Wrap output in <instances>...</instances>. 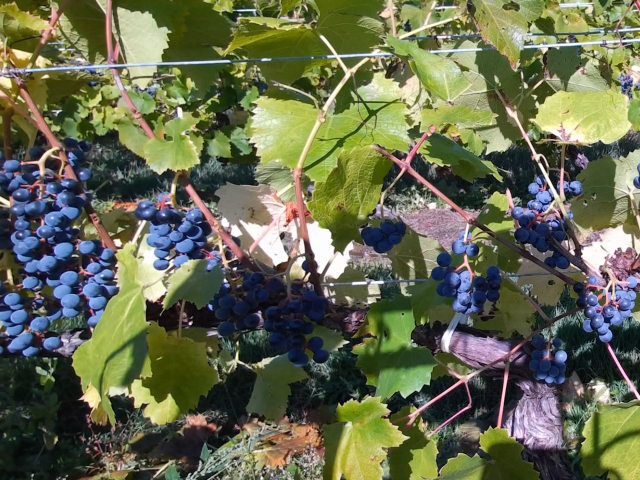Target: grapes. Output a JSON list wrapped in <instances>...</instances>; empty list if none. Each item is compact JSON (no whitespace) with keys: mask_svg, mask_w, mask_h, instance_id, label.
<instances>
[{"mask_svg":"<svg viewBox=\"0 0 640 480\" xmlns=\"http://www.w3.org/2000/svg\"><path fill=\"white\" fill-rule=\"evenodd\" d=\"M2 302L10 307V309H0V321L7 331L9 344L6 350L9 354H15L21 351L24 357H33L38 354L39 347L32 346V333H22L24 323L28 321V311L23 309L21 302V294L18 292L5 293L2 296Z\"/></svg>","mask_w":640,"mask_h":480,"instance_id":"grapes-9","label":"grapes"},{"mask_svg":"<svg viewBox=\"0 0 640 480\" xmlns=\"http://www.w3.org/2000/svg\"><path fill=\"white\" fill-rule=\"evenodd\" d=\"M22 287L27 291L37 292L43 288V280L36 276H27L21 280Z\"/></svg>","mask_w":640,"mask_h":480,"instance_id":"grapes-14","label":"grapes"},{"mask_svg":"<svg viewBox=\"0 0 640 480\" xmlns=\"http://www.w3.org/2000/svg\"><path fill=\"white\" fill-rule=\"evenodd\" d=\"M361 235L367 246H373V250L381 254L401 243L402 238L406 235V225L404 223L392 224L391 221H386L378 227H364Z\"/></svg>","mask_w":640,"mask_h":480,"instance_id":"grapes-11","label":"grapes"},{"mask_svg":"<svg viewBox=\"0 0 640 480\" xmlns=\"http://www.w3.org/2000/svg\"><path fill=\"white\" fill-rule=\"evenodd\" d=\"M533 346L537 349L531 353L529 367L532 369V375L535 381H545L548 386L554 384H562L566 381L565 373L568 355L562 347L560 338L553 339V345L559 349L555 352L554 360H545L548 357L545 347V340L542 335H536L532 339Z\"/></svg>","mask_w":640,"mask_h":480,"instance_id":"grapes-10","label":"grapes"},{"mask_svg":"<svg viewBox=\"0 0 640 480\" xmlns=\"http://www.w3.org/2000/svg\"><path fill=\"white\" fill-rule=\"evenodd\" d=\"M78 252L82 256L91 255L97 261L85 264V272L91 276L79 281V289L88 300L87 309L92 312L86 326L95 328L102 321L107 306L106 297H115L118 294L119 284L115 282V271L103 269L115 263L116 252L103 247L100 240H83L78 245Z\"/></svg>","mask_w":640,"mask_h":480,"instance_id":"grapes-6","label":"grapes"},{"mask_svg":"<svg viewBox=\"0 0 640 480\" xmlns=\"http://www.w3.org/2000/svg\"><path fill=\"white\" fill-rule=\"evenodd\" d=\"M464 232V230H461L457 240L451 244L452 254L454 256L466 254L469 258H476L479 255V248L475 243L469 245L463 243Z\"/></svg>","mask_w":640,"mask_h":480,"instance_id":"grapes-12","label":"grapes"},{"mask_svg":"<svg viewBox=\"0 0 640 480\" xmlns=\"http://www.w3.org/2000/svg\"><path fill=\"white\" fill-rule=\"evenodd\" d=\"M243 283H235V292H244L243 301H238L231 293V284L228 280L221 282L220 289L215 293V298L208 303V310L213 312V317L221 321L217 325V332L221 336H228L235 327L238 330L256 329L259 325L260 315H263V331L271 333L269 345L272 351L288 349L287 357L296 369H303L308 363V354L305 350V335L313 332V325L305 323L303 319L280 318L281 315L303 316L310 321H321L324 309L327 307V299L319 297L314 291H310L302 283H293L290 291L293 295L285 305L276 306L269 299L271 293L283 288V281L279 278H268L258 273H243Z\"/></svg>","mask_w":640,"mask_h":480,"instance_id":"grapes-2","label":"grapes"},{"mask_svg":"<svg viewBox=\"0 0 640 480\" xmlns=\"http://www.w3.org/2000/svg\"><path fill=\"white\" fill-rule=\"evenodd\" d=\"M63 146L68 149L64 156L76 179L49 180L44 185L47 192L43 193L41 201H32L31 191L20 188L21 184L34 186L41 179L38 170L15 175L21 170V162L7 160L0 173V183H7L6 190L11 192L13 198L9 215L16 217L13 221L16 230L10 234V244L25 273H51L58 265L70 262L76 253L72 241L78 237V230L71 227V221L78 220L81 209L91 202L90 193L77 194L78 181L89 182L93 176L89 167L81 166L84 156L91 150V143L67 136ZM51 194L56 199L51 201L48 208L47 199L52 198ZM41 238L48 240L54 255L46 254L39 259L33 255L42 248Z\"/></svg>","mask_w":640,"mask_h":480,"instance_id":"grapes-1","label":"grapes"},{"mask_svg":"<svg viewBox=\"0 0 640 480\" xmlns=\"http://www.w3.org/2000/svg\"><path fill=\"white\" fill-rule=\"evenodd\" d=\"M544 184V176L538 175L535 183L528 185V193L535 195V197L528 201L527 208L514 207L512 209L511 216L514 220H518V224L521 227L514 232V237L519 242L529 243L538 252L553 251L554 254L552 257H547L545 263L554 268L565 269L570 266V261L562 256L559 250L554 249L551 243L546 241V236L548 234L553 235L562 241L564 232L561 229L566 228V218L545 219L544 222H538L534 228L530 226L534 223L537 215L548 211L551 201L554 199V194L550 189L540 190V185Z\"/></svg>","mask_w":640,"mask_h":480,"instance_id":"grapes-5","label":"grapes"},{"mask_svg":"<svg viewBox=\"0 0 640 480\" xmlns=\"http://www.w3.org/2000/svg\"><path fill=\"white\" fill-rule=\"evenodd\" d=\"M309 346L312 351V360L316 363H326L330 360V354L323 348V340L320 337H311Z\"/></svg>","mask_w":640,"mask_h":480,"instance_id":"grapes-13","label":"grapes"},{"mask_svg":"<svg viewBox=\"0 0 640 480\" xmlns=\"http://www.w3.org/2000/svg\"><path fill=\"white\" fill-rule=\"evenodd\" d=\"M79 280L76 270H65L56 279L46 276L44 283L48 288H52V297L58 300V307L49 309L46 317H34L29 321V330L32 332H45L49 322H56L63 317L75 318L82 313L80 297L77 292H73V287Z\"/></svg>","mask_w":640,"mask_h":480,"instance_id":"grapes-8","label":"grapes"},{"mask_svg":"<svg viewBox=\"0 0 640 480\" xmlns=\"http://www.w3.org/2000/svg\"><path fill=\"white\" fill-rule=\"evenodd\" d=\"M452 264V255L441 252L437 256V266L432 268L431 279L442 281L437 285V293L441 296L454 297L452 310L461 316L479 314L485 302H495L500 298L498 289L501 286L500 269L490 266L487 279L473 276L466 270H458Z\"/></svg>","mask_w":640,"mask_h":480,"instance_id":"grapes-4","label":"grapes"},{"mask_svg":"<svg viewBox=\"0 0 640 480\" xmlns=\"http://www.w3.org/2000/svg\"><path fill=\"white\" fill-rule=\"evenodd\" d=\"M137 220L151 222L149 235L146 238L147 245L156 249L154 255V269L166 270L169 261L164 260L169 255V250L175 247L178 254L189 253L196 246L203 248L207 244V237L213 232L210 223L204 220V214L199 209H193L184 216L173 209H161L160 211L150 200L138 203L134 210Z\"/></svg>","mask_w":640,"mask_h":480,"instance_id":"grapes-3","label":"grapes"},{"mask_svg":"<svg viewBox=\"0 0 640 480\" xmlns=\"http://www.w3.org/2000/svg\"><path fill=\"white\" fill-rule=\"evenodd\" d=\"M218 254H219V251H218V250H213V251H211V252H210V255H211V256H216V255H218ZM220 260H221V257H220V256H216V257H213L212 259H210V260L208 261V263H207L206 270H207L208 272H212L213 270H215V269H216V267H217V265H218V262H219Z\"/></svg>","mask_w":640,"mask_h":480,"instance_id":"grapes-15","label":"grapes"},{"mask_svg":"<svg viewBox=\"0 0 640 480\" xmlns=\"http://www.w3.org/2000/svg\"><path fill=\"white\" fill-rule=\"evenodd\" d=\"M625 281L629 284L624 285L623 288L621 284L615 286L613 303H618V308L607 305L602 311L598 296L590 293L583 282H578L576 286H573V289L579 294L576 305L585 309V315L588 317L582 321V329L586 334H592L597 329L598 340L601 343H608L613 339V332L609 327L620 326L624 319L631 316V309L635 307L634 300L637 298V292L630 289L638 285V279L626 277Z\"/></svg>","mask_w":640,"mask_h":480,"instance_id":"grapes-7","label":"grapes"}]
</instances>
